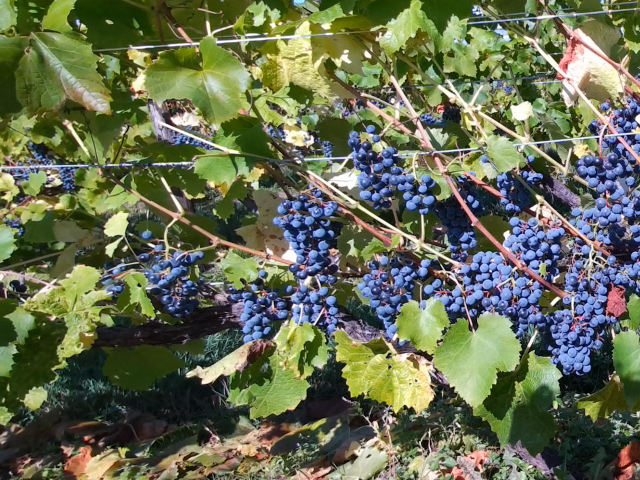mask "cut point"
<instances>
[{"mask_svg":"<svg viewBox=\"0 0 640 480\" xmlns=\"http://www.w3.org/2000/svg\"><path fill=\"white\" fill-rule=\"evenodd\" d=\"M178 223V221H176L174 218L166 225V227L164 228L163 231V242L165 245L169 244V240H168V234L170 229L176 224Z\"/></svg>","mask_w":640,"mask_h":480,"instance_id":"6a23745f","label":"cut point"},{"mask_svg":"<svg viewBox=\"0 0 640 480\" xmlns=\"http://www.w3.org/2000/svg\"><path fill=\"white\" fill-rule=\"evenodd\" d=\"M605 131H606V128L602 125V127L600 128V133H599V137H598V147L599 148H602V146H603L602 141L604 140Z\"/></svg>","mask_w":640,"mask_h":480,"instance_id":"7d7e1d6f","label":"cut point"},{"mask_svg":"<svg viewBox=\"0 0 640 480\" xmlns=\"http://www.w3.org/2000/svg\"><path fill=\"white\" fill-rule=\"evenodd\" d=\"M218 247H219V244H217V243H213V244H211V245L202 246V247H201V250H203V251H209V250H214V249H216V248H218Z\"/></svg>","mask_w":640,"mask_h":480,"instance_id":"deb38ca7","label":"cut point"}]
</instances>
